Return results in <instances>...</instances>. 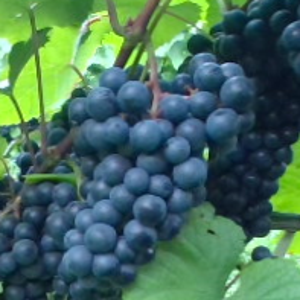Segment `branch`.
<instances>
[{
  "label": "branch",
  "mask_w": 300,
  "mask_h": 300,
  "mask_svg": "<svg viewBox=\"0 0 300 300\" xmlns=\"http://www.w3.org/2000/svg\"><path fill=\"white\" fill-rule=\"evenodd\" d=\"M21 203V198L19 196H15L12 198L7 204L6 208L2 210V214L4 216H8L12 212V217L15 221L20 219L19 215V205Z\"/></svg>",
  "instance_id": "branch-3"
},
{
  "label": "branch",
  "mask_w": 300,
  "mask_h": 300,
  "mask_svg": "<svg viewBox=\"0 0 300 300\" xmlns=\"http://www.w3.org/2000/svg\"><path fill=\"white\" fill-rule=\"evenodd\" d=\"M73 147L72 134L67 132L62 141L51 148L40 165L32 172V176L37 178L41 173H46L49 167Z\"/></svg>",
  "instance_id": "branch-2"
},
{
  "label": "branch",
  "mask_w": 300,
  "mask_h": 300,
  "mask_svg": "<svg viewBox=\"0 0 300 300\" xmlns=\"http://www.w3.org/2000/svg\"><path fill=\"white\" fill-rule=\"evenodd\" d=\"M161 6V0H148L141 14L135 22L120 25L116 14V6L109 4L107 6V18L112 32L117 37H123L116 57L113 61L115 69L125 68L136 49L140 46V36L149 29L155 9Z\"/></svg>",
  "instance_id": "branch-1"
}]
</instances>
